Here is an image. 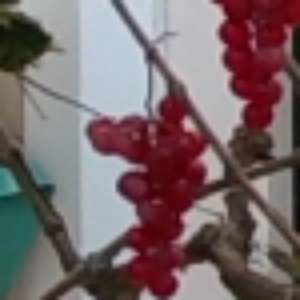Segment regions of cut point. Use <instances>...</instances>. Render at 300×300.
Instances as JSON below:
<instances>
[{"instance_id":"1","label":"cut point","mask_w":300,"mask_h":300,"mask_svg":"<svg viewBox=\"0 0 300 300\" xmlns=\"http://www.w3.org/2000/svg\"><path fill=\"white\" fill-rule=\"evenodd\" d=\"M143 58L147 64V98L144 101V108L147 110L148 119L153 118V110L150 106L152 99V57L147 51L143 52Z\"/></svg>"}]
</instances>
